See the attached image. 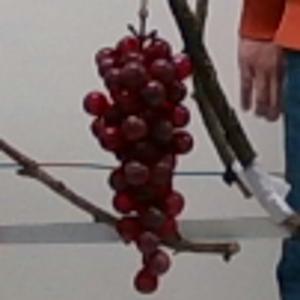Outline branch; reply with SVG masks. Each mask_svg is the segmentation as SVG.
<instances>
[{"label":"branch","instance_id":"1","mask_svg":"<svg viewBox=\"0 0 300 300\" xmlns=\"http://www.w3.org/2000/svg\"><path fill=\"white\" fill-rule=\"evenodd\" d=\"M165 3L180 36L179 53L189 56L194 65L189 99L196 104L201 125L223 167L222 183L229 189L235 184L244 200L255 198L281 228L300 239V216L272 185L208 53L205 33L210 0H195L194 10L188 0Z\"/></svg>","mask_w":300,"mask_h":300},{"label":"branch","instance_id":"2","mask_svg":"<svg viewBox=\"0 0 300 300\" xmlns=\"http://www.w3.org/2000/svg\"><path fill=\"white\" fill-rule=\"evenodd\" d=\"M0 152L18 167L13 172L14 176L36 180L42 186L53 191L60 199L92 218V223L114 230L126 246L134 242V240L126 239L120 233L119 223L123 216H115L112 212L83 197L77 190L68 186L64 179H59L44 170L36 159L29 157L5 138H0Z\"/></svg>","mask_w":300,"mask_h":300},{"label":"branch","instance_id":"3","mask_svg":"<svg viewBox=\"0 0 300 300\" xmlns=\"http://www.w3.org/2000/svg\"><path fill=\"white\" fill-rule=\"evenodd\" d=\"M166 250H174L172 256H177L180 253L212 255L220 257L222 262L229 264L231 259L238 255L242 250L241 243L237 240L228 242H204L196 241L184 236L182 230L179 241L176 245Z\"/></svg>","mask_w":300,"mask_h":300}]
</instances>
